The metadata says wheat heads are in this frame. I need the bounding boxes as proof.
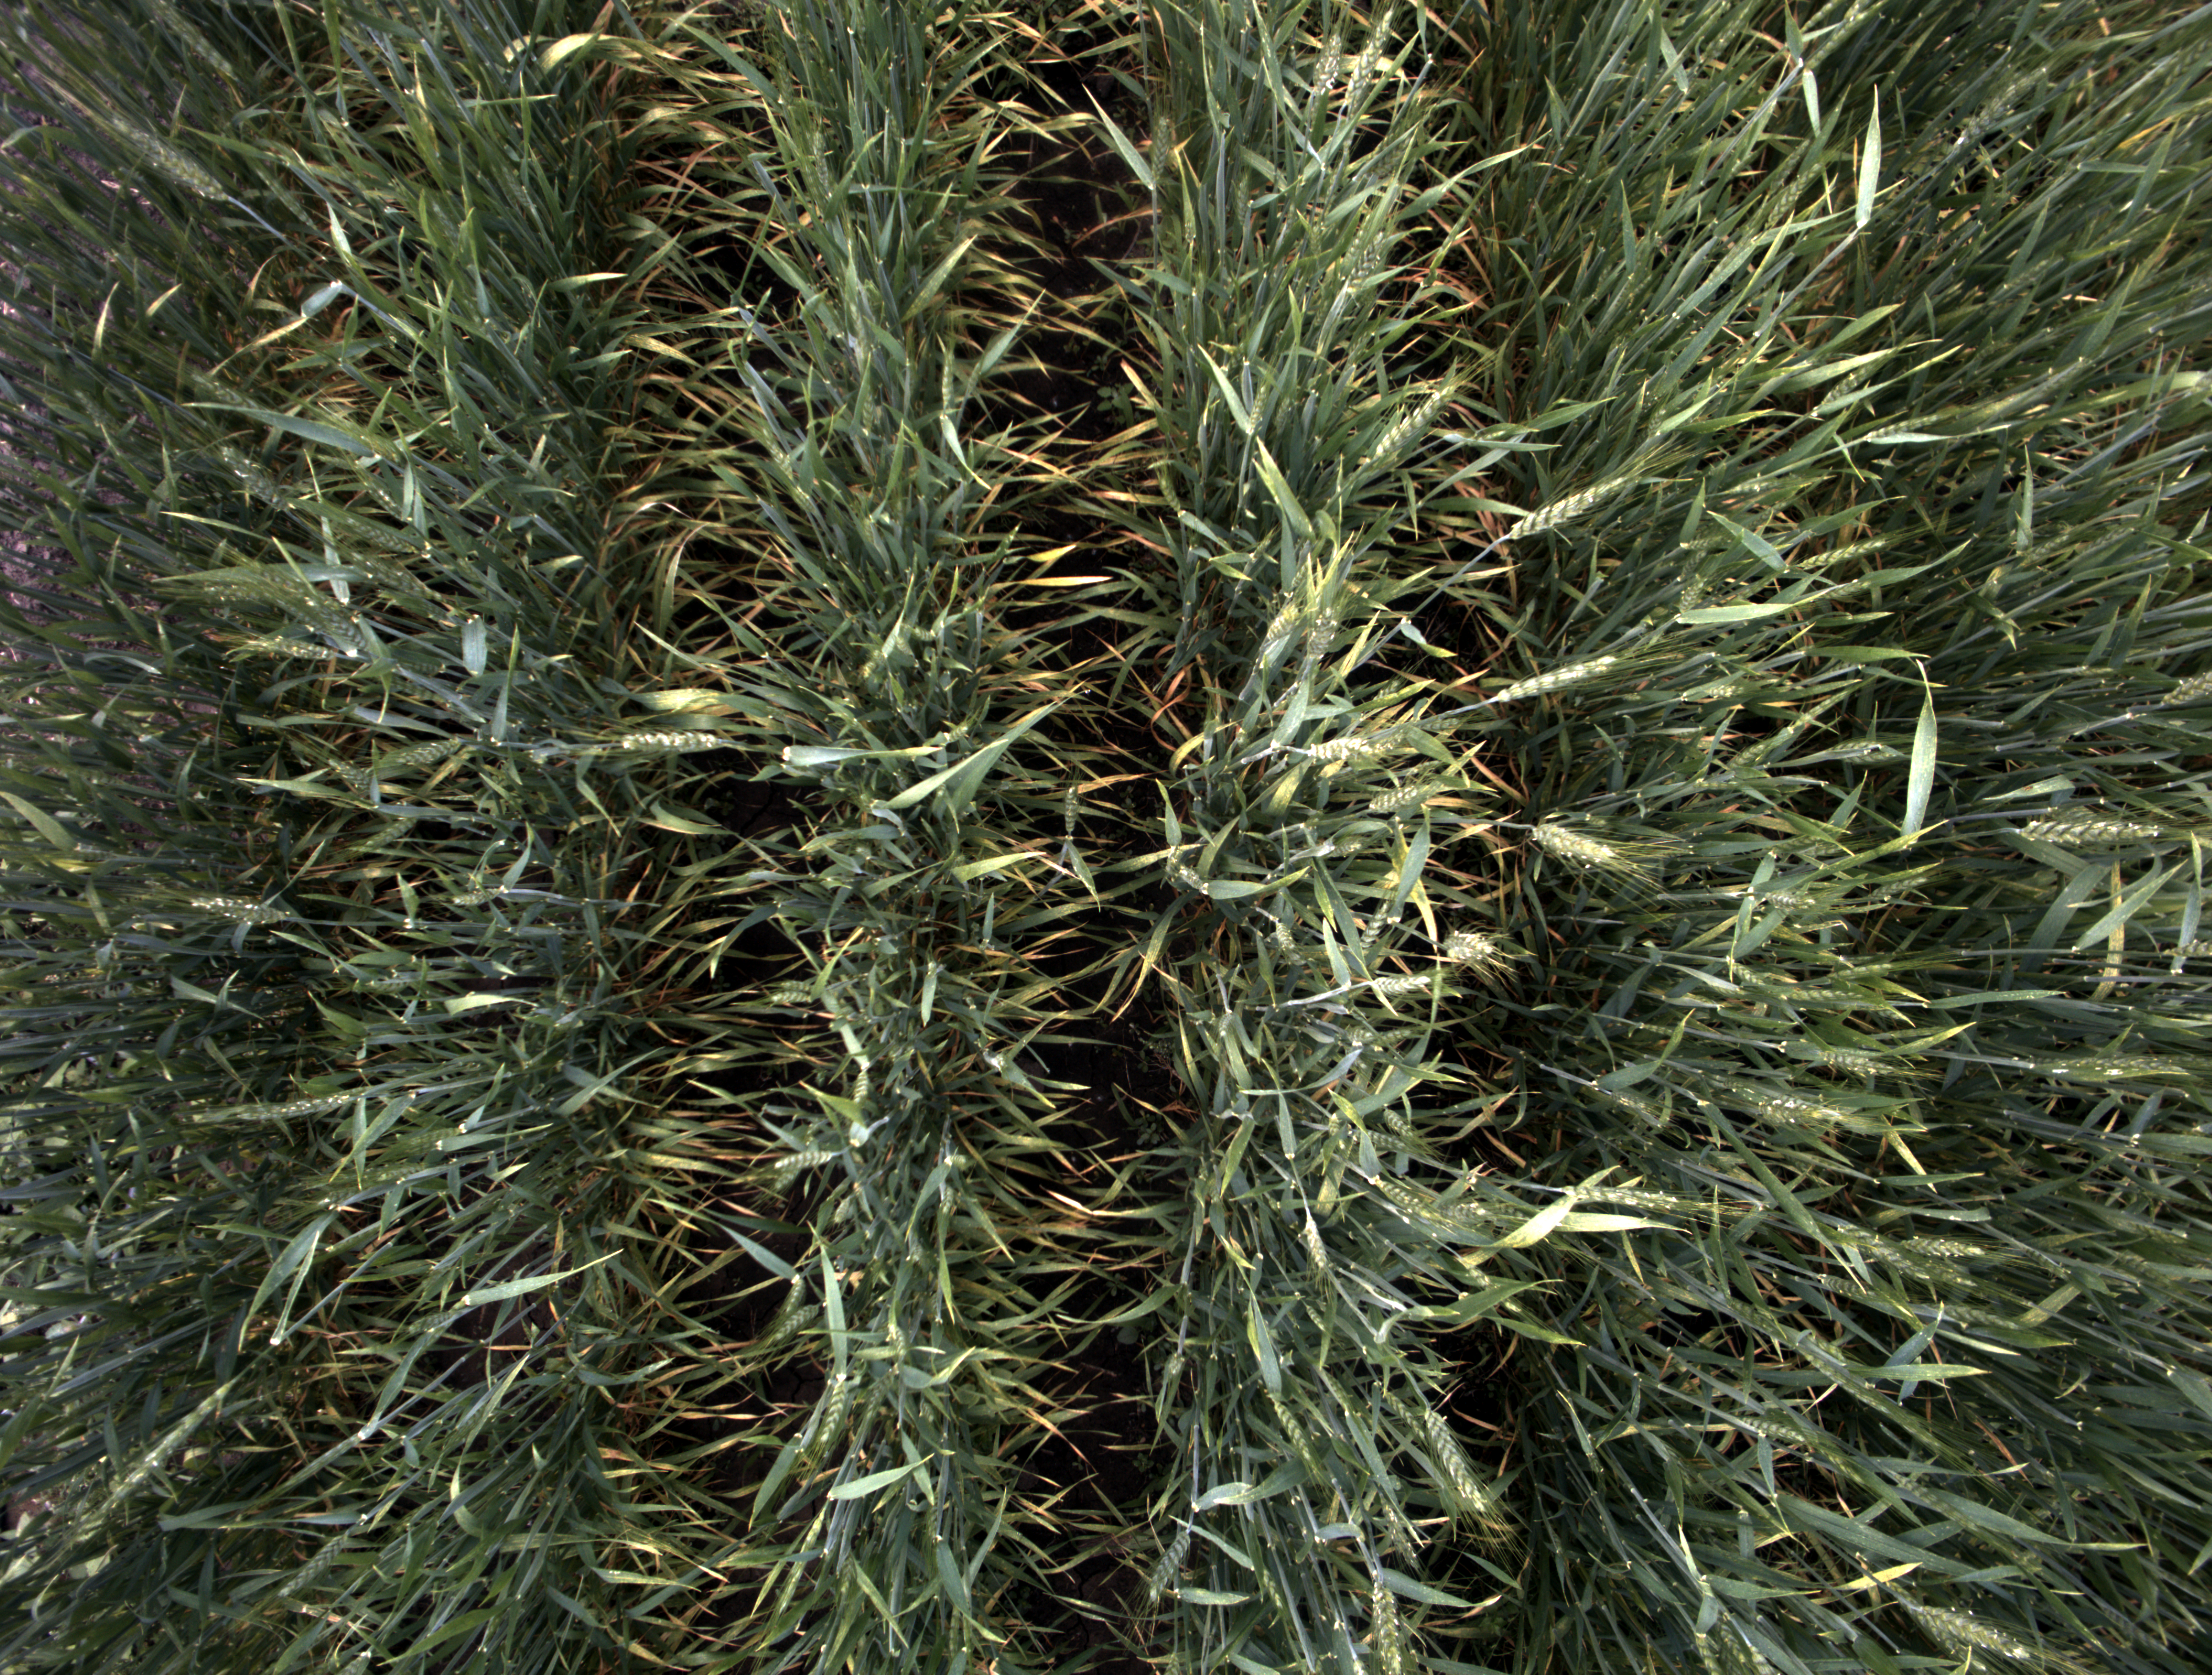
[1765,1095,1849,1121]
[1619,272,1635,306]
[1373,676,1398,706]
[1728,739,1777,766]
[1525,819,1626,864]
[188,892,295,926]
[403,657,440,675]
[1388,1107,1434,1148]
[2043,1048,2179,1084]
[1153,113,1174,177]
[1947,81,2032,155]
[760,1306,824,1346]
[1172,857,1210,896]
[1228,167,1251,241]
[487,170,512,202]
[1427,1408,1487,1520]
[868,1369,904,1418]
[1301,609,1341,681]
[1707,684,1729,697]
[816,1372,847,1456]
[812,135,831,193]
[1996,255,2070,304]
[1498,656,1610,704]
[1366,1178,1445,1241]
[1147,1532,1196,1596]
[119,120,231,195]
[2123,1253,2168,1286]
[950,1605,961,1662]
[434,1402,489,1452]
[505,163,532,213]
[341,512,423,556]
[1818,360,1890,403]
[1894,1470,1990,1535]
[2112,1208,2183,1248]
[1644,408,1665,432]
[1549,1184,1665,1213]
[1703,245,1743,285]
[1445,929,1502,978]
[1767,136,1809,204]
[1701,769,1747,796]
[2094,1599,2165,1653]
[923,1487,937,1550]
[969,360,983,398]
[1256,599,1311,679]
[1909,1304,2014,1328]
[1160,1651,1178,1671]
[1315,23,1349,99]
[2139,1557,2205,1602]
[1682,553,1704,575]
[482,1603,512,1646]
[1814,1442,1863,1488]
[213,585,272,606]
[1366,1586,1406,1669]
[1829,736,1909,768]
[891,1328,905,1364]
[1761,163,1833,222]
[1311,736,1400,769]
[904,624,934,645]
[1303,1304,1325,1332]
[366,481,407,524]
[776,974,816,992]
[2023,824,2161,853]
[1687,535,1725,548]
[788,1511,831,1595]
[1812,1046,1887,1077]
[845,300,870,360]
[777,1154,836,1175]
[936,350,959,405]
[414,1125,477,1141]
[2172,937,2212,957]
[1832,1219,1932,1286]
[614,730,722,753]
[1301,1216,1331,1274]
[1707,1602,1749,1664]
[2152,41,2210,83]
[483,421,508,460]
[1821,959,1896,981]
[1634,1017,1669,1039]
[1381,1502,1418,1577]
[254,641,345,670]
[760,444,793,478]
[1366,1027,1411,1047]
[1796,1324,1847,1359]
[101,1388,226,1536]
[66,390,112,422]
[1706,1,1761,62]
[841,1547,857,1596]
[372,1161,434,1182]
[1754,884,1803,910]
[1160,480,1180,517]
[904,265,947,320]
[1712,1297,1780,1337]
[1748,503,1788,528]
[2163,670,2208,704]
[1060,791,1076,837]
[1321,1372,1352,1418]
[1366,780,1420,810]
[1769,830,1829,857]
[1691,1633,1723,1675]
[1244,384,1270,425]
[1454,1260,1523,1319]
[329,609,380,659]
[1382,1385,1425,1443]
[1509,478,1628,542]
[791,143,827,218]
[1804,538,1891,569]
[1872,875,1925,900]
[2023,361,2087,399]
[1372,972,1436,995]
[1363,391,1455,467]
[1372,133,1414,188]
[1740,1417,1807,1446]
[1749,1648,1783,1675]
[1780,1344,1896,1410]
[776,994,818,1011]
[347,554,446,601]
[1417,719,1457,731]
[1274,922,1297,949]
[373,739,478,769]
[1820,581,1872,601]
[1270,1402,1322,1491]
[156,7,243,78]
[1874,416,1941,435]
[279,1536,347,1593]
[430,204,452,240]
[348,976,423,997]
[852,1063,870,1098]
[1901,1233,1987,1262]
[1327,153,1347,210]
[187,369,259,405]
[329,759,373,810]
[1591,1079,1654,1110]
[238,1095,364,1125]
[1168,1359,1181,1383]
[1774,990,1854,1010]
[409,1308,455,1338]
[220,449,290,515]
[388,676,431,701]
[1366,1130,1411,1157]
[1808,12,1870,69]
[363,819,416,851]
[865,385,879,441]
[1439,1196,1521,1228]
[2012,537,2063,570]
[1343,5,1393,117]
[2074,530,2136,557]
[1876,1577,1981,1668]
[2150,1148,2208,1177]
[1349,905,1393,960]
[2025,1246,2076,1282]
[1350,234,1386,291]
[1909,1602,2021,1655]
[943,724,971,740]
[1679,579,1709,609]
[450,890,507,910]
[1725,950,1767,993]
